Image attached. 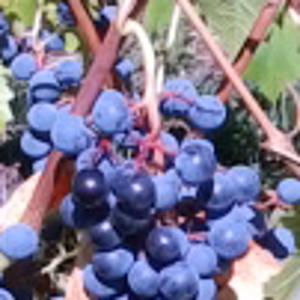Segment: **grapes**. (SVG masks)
<instances>
[{
	"label": "grapes",
	"mask_w": 300,
	"mask_h": 300,
	"mask_svg": "<svg viewBox=\"0 0 300 300\" xmlns=\"http://www.w3.org/2000/svg\"><path fill=\"white\" fill-rule=\"evenodd\" d=\"M0 13V64L25 83L28 127L18 152L40 173L51 152L70 153L75 169L58 217L70 231L89 229L90 263L82 272L88 300H218L233 260L252 245L286 259L295 237L268 230L257 201L261 176L251 164L224 170L214 133L229 123V106L215 93L199 95L185 78L161 86L158 127L146 125L144 103L119 87L97 91L86 119L58 100L76 88L84 66L63 59L38 70L21 53Z\"/></svg>",
	"instance_id": "grapes-1"
},
{
	"label": "grapes",
	"mask_w": 300,
	"mask_h": 300,
	"mask_svg": "<svg viewBox=\"0 0 300 300\" xmlns=\"http://www.w3.org/2000/svg\"><path fill=\"white\" fill-rule=\"evenodd\" d=\"M41 250V238L27 224L14 223L0 229V255L16 262L28 261Z\"/></svg>",
	"instance_id": "grapes-2"
},
{
	"label": "grapes",
	"mask_w": 300,
	"mask_h": 300,
	"mask_svg": "<svg viewBox=\"0 0 300 300\" xmlns=\"http://www.w3.org/2000/svg\"><path fill=\"white\" fill-rule=\"evenodd\" d=\"M276 199L282 205H297L300 203V181L287 177L276 185Z\"/></svg>",
	"instance_id": "grapes-3"
},
{
	"label": "grapes",
	"mask_w": 300,
	"mask_h": 300,
	"mask_svg": "<svg viewBox=\"0 0 300 300\" xmlns=\"http://www.w3.org/2000/svg\"><path fill=\"white\" fill-rule=\"evenodd\" d=\"M39 37L43 40L44 49L48 53H60L66 48L64 37L50 28L41 29Z\"/></svg>",
	"instance_id": "grapes-4"
},
{
	"label": "grapes",
	"mask_w": 300,
	"mask_h": 300,
	"mask_svg": "<svg viewBox=\"0 0 300 300\" xmlns=\"http://www.w3.org/2000/svg\"><path fill=\"white\" fill-rule=\"evenodd\" d=\"M115 75L121 80H127L133 73V62L130 58L119 56L113 65Z\"/></svg>",
	"instance_id": "grapes-5"
},
{
	"label": "grapes",
	"mask_w": 300,
	"mask_h": 300,
	"mask_svg": "<svg viewBox=\"0 0 300 300\" xmlns=\"http://www.w3.org/2000/svg\"><path fill=\"white\" fill-rule=\"evenodd\" d=\"M55 11L57 13L58 20L63 27L67 29H73L76 27L77 24L73 12L69 10L66 3H57L55 6Z\"/></svg>",
	"instance_id": "grapes-6"
},
{
	"label": "grapes",
	"mask_w": 300,
	"mask_h": 300,
	"mask_svg": "<svg viewBox=\"0 0 300 300\" xmlns=\"http://www.w3.org/2000/svg\"><path fill=\"white\" fill-rule=\"evenodd\" d=\"M118 11V8L114 4L103 6L99 10V23L103 27H108L110 22L113 20L114 15Z\"/></svg>",
	"instance_id": "grapes-7"
}]
</instances>
